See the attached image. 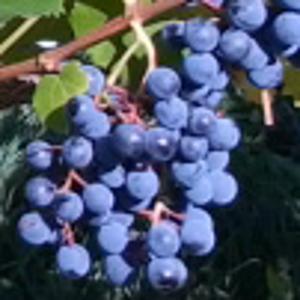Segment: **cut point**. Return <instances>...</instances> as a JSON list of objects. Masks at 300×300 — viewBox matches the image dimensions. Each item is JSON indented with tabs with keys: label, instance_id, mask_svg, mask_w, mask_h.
<instances>
[{
	"label": "cut point",
	"instance_id": "obj_1",
	"mask_svg": "<svg viewBox=\"0 0 300 300\" xmlns=\"http://www.w3.org/2000/svg\"><path fill=\"white\" fill-rule=\"evenodd\" d=\"M135 30L138 35V40H136L133 45L129 48L126 54L121 56V59L115 64L114 68L111 70L110 74L107 76L105 84L111 86L113 80L117 77V74L121 71L122 67L130 60L136 53V51L144 44L147 55H148V67L154 69L157 65V58L155 49L149 39V36L142 23L135 26Z\"/></svg>",
	"mask_w": 300,
	"mask_h": 300
}]
</instances>
